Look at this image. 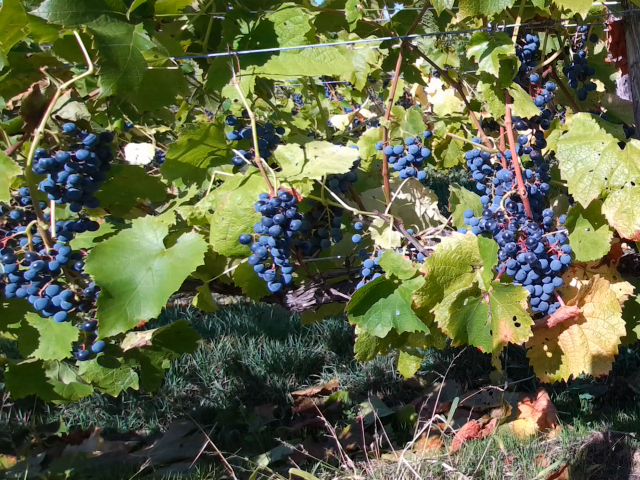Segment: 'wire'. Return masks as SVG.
<instances>
[{"mask_svg":"<svg viewBox=\"0 0 640 480\" xmlns=\"http://www.w3.org/2000/svg\"><path fill=\"white\" fill-rule=\"evenodd\" d=\"M553 22H554L553 18L533 19V20L515 22L509 25L479 26V27L460 29V30H442V31L424 32L420 34H403V35H393V36H387V37L361 38L358 40H344V41L324 42V43H308L300 46H276L271 48L255 49V50H247V51L209 52L202 55H179V56H171L170 60L171 61L204 60L211 57L249 56V55H257V54H267V53H273V52H279V51H302L310 48L361 45L363 43L389 42V41L405 40V39H423L427 37L444 36V35L471 34V33H477L481 31L512 30L522 26H529V25H535V24H551Z\"/></svg>","mask_w":640,"mask_h":480,"instance_id":"obj_1","label":"wire"},{"mask_svg":"<svg viewBox=\"0 0 640 480\" xmlns=\"http://www.w3.org/2000/svg\"><path fill=\"white\" fill-rule=\"evenodd\" d=\"M357 257H358L357 253L340 254V255H330V256H324V257H307V258H303L302 262L303 263L327 262V261L342 260V259H355Z\"/></svg>","mask_w":640,"mask_h":480,"instance_id":"obj_2","label":"wire"}]
</instances>
